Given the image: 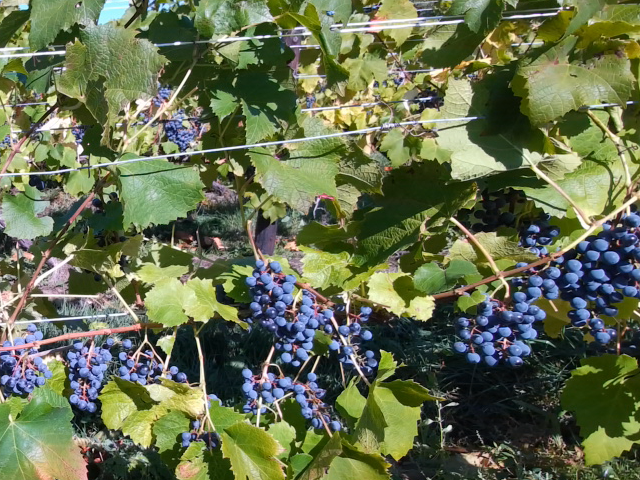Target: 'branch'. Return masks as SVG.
Instances as JSON below:
<instances>
[{"mask_svg": "<svg viewBox=\"0 0 640 480\" xmlns=\"http://www.w3.org/2000/svg\"><path fill=\"white\" fill-rule=\"evenodd\" d=\"M161 327H162L161 323H142L138 325H127L123 327L104 328V329H98V330H93L88 332H78V333H72V334L63 335V336H55L50 339L41 340V341H37L36 343H31V344H26L21 346H12V347L3 348L1 345L0 352L4 350L23 351V350L33 349L38 346L49 345L57 341H66L74 338L90 337V336H96V335L106 334V333L125 332L129 330H141L144 328H161Z\"/></svg>", "mask_w": 640, "mask_h": 480, "instance_id": "170604dd", "label": "branch"}, {"mask_svg": "<svg viewBox=\"0 0 640 480\" xmlns=\"http://www.w3.org/2000/svg\"><path fill=\"white\" fill-rule=\"evenodd\" d=\"M63 105L62 101H58L53 107H51L50 109H46L44 112L41 113V115L37 118V120L32 124V126L29 128V130L26 132L24 138L15 146V148L11 151V153L8 155V157L6 158V160L3 163L2 168L0 169V172L6 171L9 163L11 162V160L13 159V157L18 153V151L26 144V142L30 139V136L32 135V133L34 132V130L40 125V123L42 122V120L48 116L49 114H52L53 112H55L57 109H59L61 106Z\"/></svg>", "mask_w": 640, "mask_h": 480, "instance_id": "45aa463d", "label": "branch"}, {"mask_svg": "<svg viewBox=\"0 0 640 480\" xmlns=\"http://www.w3.org/2000/svg\"><path fill=\"white\" fill-rule=\"evenodd\" d=\"M274 351H275V347H274V346H271V347H270V349H269V351H268V355H267V358H266V360H265L264 367H263L262 372H261V377L259 378V381H260V382H263V381H264V378L266 377V374H267L268 369H269V367H270V362H271V360H272V357H273V353H274Z\"/></svg>", "mask_w": 640, "mask_h": 480, "instance_id": "1ff4a987", "label": "branch"}, {"mask_svg": "<svg viewBox=\"0 0 640 480\" xmlns=\"http://www.w3.org/2000/svg\"><path fill=\"white\" fill-rule=\"evenodd\" d=\"M111 178H112L111 174H106L100 180L99 184L95 188H93L92 190H90L88 192V194L83 198L80 206L72 214L71 218L66 222V224L62 227V229L59 231V233L52 239V241L50 242V245L45 248L42 260L40 261L38 266L35 268V270L33 271L32 275L30 276V278L28 280V283H27L26 290H25L23 296L21 297V299L15 305V308L13 310V313L11 314V317L9 318V321H8L7 325L5 326L4 330L0 334V342L1 343L5 342V337L9 333L10 328L13 326L14 321H15L17 315H18V312H19L21 306L25 303L26 299L29 297V294L31 292L34 280L36 279L37 275L39 274V272L41 271V269L43 268V266L47 262V259H48L50 251L54 250V247L57 244V242L64 236V234L69 229V227L75 222V220L78 217V215L85 208V206L88 203L89 199L92 198L93 195L96 194L98 191H100L101 188L104 187V184Z\"/></svg>", "mask_w": 640, "mask_h": 480, "instance_id": "325d2c04", "label": "branch"}, {"mask_svg": "<svg viewBox=\"0 0 640 480\" xmlns=\"http://www.w3.org/2000/svg\"><path fill=\"white\" fill-rule=\"evenodd\" d=\"M294 285L298 286V287H300V288H302V289H304L306 291H308L311 294H314L316 297H318L320 300H322L326 305H328V306H333L334 305L333 301H330L329 299H327L325 295H323L318 290L312 288L311 286L306 285V284L302 283L301 281H295Z\"/></svg>", "mask_w": 640, "mask_h": 480, "instance_id": "982ccf7c", "label": "branch"}, {"mask_svg": "<svg viewBox=\"0 0 640 480\" xmlns=\"http://www.w3.org/2000/svg\"><path fill=\"white\" fill-rule=\"evenodd\" d=\"M639 199H640V191H638L637 193L632 194L629 198H627L621 204L616 206L612 211H610L607 214H605L598 222L594 223L584 234L578 236L572 242H569V243H567L565 245H562L560 248L554 250L553 252H550L549 254L543 255L542 257H538L537 259L532 260L531 262L525 264L524 266L516 267V268H513V269H504V270H500V271H498L496 273H492V274L488 275L487 277L481 278L480 280L474 281V282L469 283V284H467L465 286L447 288V289H445L444 291H442L440 293H436L434 295V298L436 300H442V299L446 298L449 295L467 293V292L472 291V290H474L476 288L482 287L483 285L489 284L490 282H492L494 280H498L500 278L507 277V276H515V275H518V274L526 273V272L530 271L531 269H533L534 267H537V266H539L541 264L549 262V261L557 258L558 256L563 255L565 252H567V251H569L571 249H574L580 243H582V242L586 241L587 239H589L594 234L595 231L600 229L610 219L614 218L617 214H619L621 211L626 209L634 201L639 200Z\"/></svg>", "mask_w": 640, "mask_h": 480, "instance_id": "30e6481e", "label": "branch"}]
</instances>
